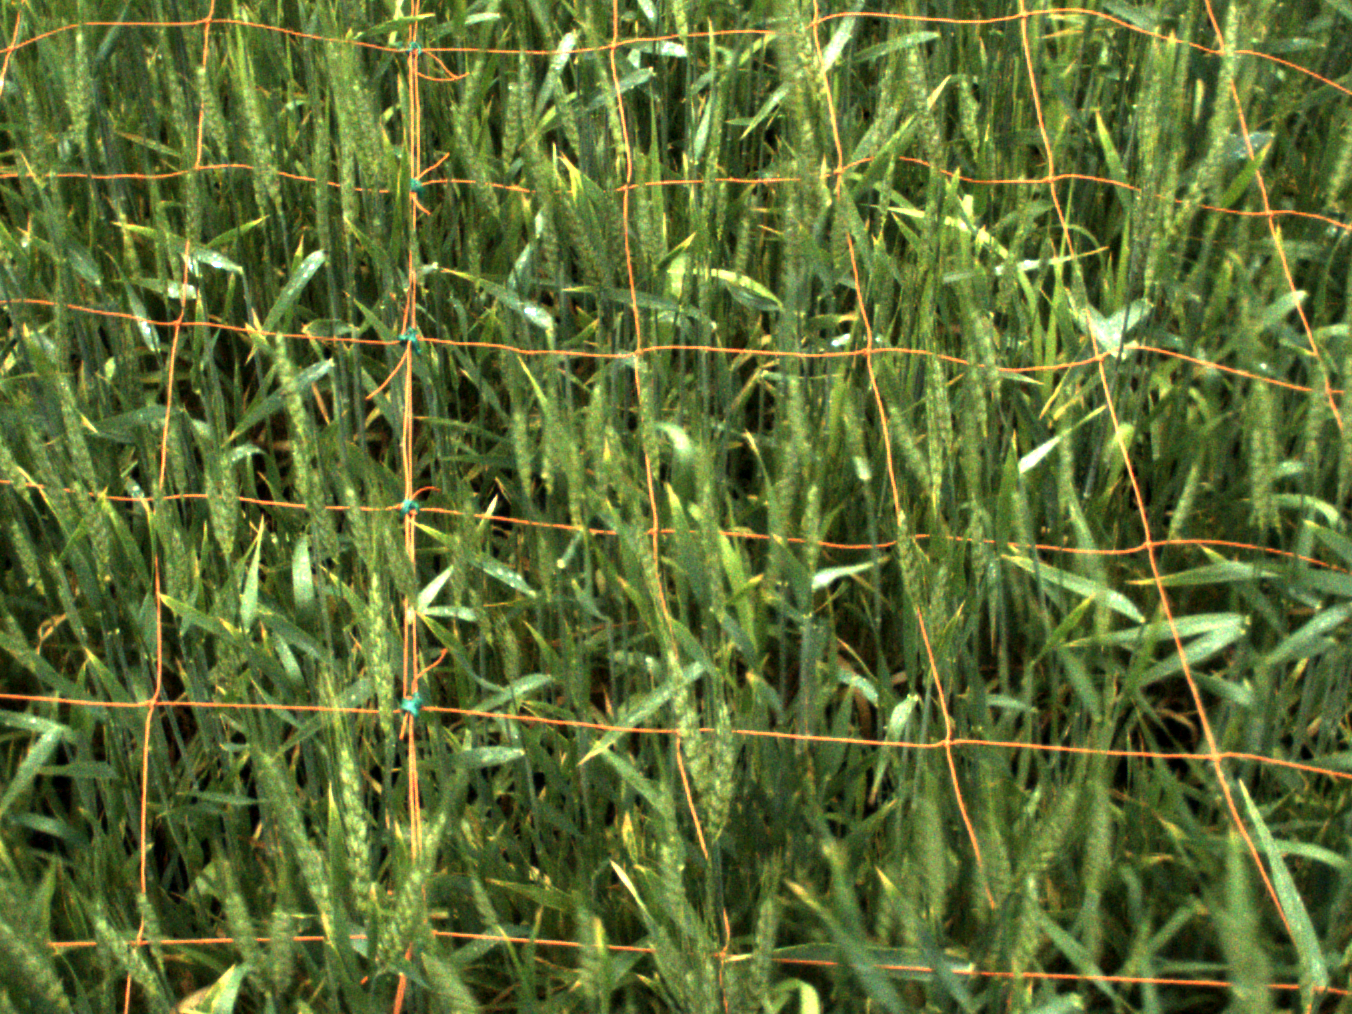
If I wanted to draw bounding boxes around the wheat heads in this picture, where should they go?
[1214,828,1261,997]
[121,321,140,396]
[163,229,183,282]
[1126,237,1147,283]
[143,977,175,1014]
[969,854,993,924]
[925,561,954,646]
[713,179,729,241]
[560,193,614,291]
[1324,122,1352,208]
[969,301,1002,398]
[796,118,826,228]
[733,215,751,276]
[305,467,342,563]
[697,481,716,554]
[466,226,484,278]
[1011,490,1031,550]
[657,842,717,945]
[149,478,171,548]
[5,517,48,594]
[1168,464,1202,542]
[96,921,167,997]
[588,452,609,494]
[1129,193,1148,230]
[215,636,246,700]
[870,240,890,301]
[52,378,99,482]
[773,18,810,130]
[697,955,733,1014]
[740,897,779,1014]
[560,435,583,519]
[380,524,422,597]
[69,28,91,148]
[539,386,561,491]
[557,72,582,154]
[960,408,985,491]
[565,654,591,707]
[165,66,192,137]
[1065,263,1090,312]
[536,534,558,599]
[1337,354,1352,504]
[704,705,739,840]
[1207,0,1242,210]
[671,0,689,44]
[963,344,989,423]
[604,175,637,286]
[1236,938,1274,1014]
[1239,383,1272,457]
[193,67,232,157]
[1014,173,1030,210]
[798,482,820,572]
[152,240,173,299]
[894,504,925,609]
[466,586,496,642]
[840,393,869,462]
[684,962,711,1014]
[1117,922,1151,990]
[1168,129,1233,244]
[1259,419,1278,474]
[629,515,661,603]
[1249,426,1270,525]
[955,78,983,152]
[266,901,294,996]
[92,896,113,973]
[874,871,897,942]
[136,889,167,950]
[1039,240,1052,276]
[114,208,144,279]
[0,896,75,1014]
[199,467,234,552]
[446,544,470,601]
[868,62,892,148]
[998,222,1029,304]
[1007,872,1048,983]
[458,496,483,545]
[930,356,956,458]
[920,381,944,504]
[680,247,695,314]
[786,378,814,480]
[507,409,533,497]
[273,332,309,435]
[1162,149,1184,227]
[48,169,69,249]
[343,479,375,566]
[469,867,500,929]
[285,437,311,502]
[415,813,442,867]
[786,189,812,280]
[634,191,655,266]
[2,610,36,672]
[1085,780,1114,892]
[336,742,374,917]
[0,409,37,507]
[602,426,628,500]
[418,950,484,1014]
[918,794,949,919]
[1055,433,1074,510]
[241,83,283,207]
[901,42,946,159]
[696,276,714,316]
[1199,261,1231,345]
[1269,63,1311,118]
[70,478,115,587]
[374,868,424,973]
[183,170,206,256]
[596,65,627,153]
[499,79,522,174]
[24,420,77,530]
[986,831,1014,903]
[539,207,563,273]
[247,145,270,211]
[914,199,938,272]
[256,751,334,916]
[163,429,192,491]
[163,559,179,612]
[448,60,485,166]
[647,207,664,262]
[582,384,608,465]
[333,109,362,243]
[0,866,31,932]
[218,886,269,980]
[49,284,72,377]
[367,569,399,741]
[666,644,713,798]
[644,917,691,999]
[351,78,387,160]
[878,159,895,227]
[772,0,823,99]
[310,114,335,251]
[168,524,194,593]
[1051,114,1074,148]
[968,491,990,579]
[1134,74,1167,173]
[984,141,1001,191]
[347,101,380,190]
[899,868,923,943]
[23,86,49,186]
[514,50,554,205]
[218,447,242,540]
[705,550,729,616]
[699,87,725,232]
[449,103,503,221]
[637,384,666,479]
[1295,938,1315,1014]
[829,191,853,266]
[702,858,716,919]
[891,302,913,370]
[62,59,80,121]
[1143,233,1161,288]
[0,986,49,1014]
[888,405,932,490]
[1301,362,1330,444]
[1019,785,1080,882]
[716,964,747,1014]
[1343,247,1352,339]
[573,906,599,998]
[498,627,520,683]
[779,448,804,522]
[657,781,688,868]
